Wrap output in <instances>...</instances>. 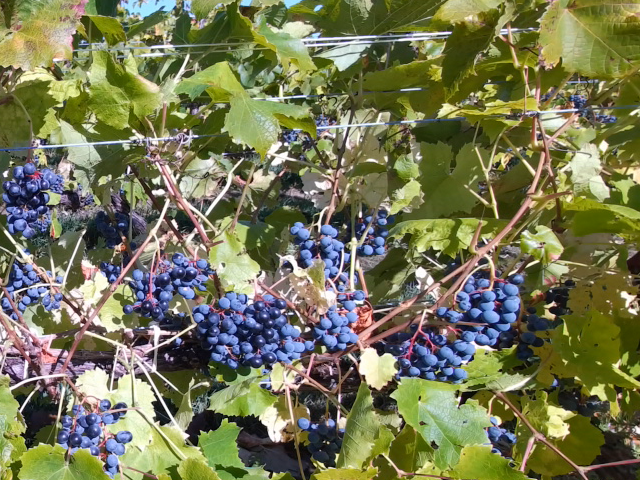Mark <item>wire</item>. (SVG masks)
<instances>
[{
	"instance_id": "obj_1",
	"label": "wire",
	"mask_w": 640,
	"mask_h": 480,
	"mask_svg": "<svg viewBox=\"0 0 640 480\" xmlns=\"http://www.w3.org/2000/svg\"><path fill=\"white\" fill-rule=\"evenodd\" d=\"M451 30L405 32V33H374L365 36H330V37H302V42H332L335 43H305V48H338L353 45H391L396 43H416L428 41H445L449 39Z\"/></svg>"
},
{
	"instance_id": "obj_2",
	"label": "wire",
	"mask_w": 640,
	"mask_h": 480,
	"mask_svg": "<svg viewBox=\"0 0 640 480\" xmlns=\"http://www.w3.org/2000/svg\"><path fill=\"white\" fill-rule=\"evenodd\" d=\"M257 41H227L226 43L218 42H201L187 44H165V45H128V46H108L107 50L111 52L130 51V50H167V49H189L216 47L208 49H196L186 52H165V53H136V58H167V57H188L198 54L222 53V52H273V47H235V46H257Z\"/></svg>"
},
{
	"instance_id": "obj_3",
	"label": "wire",
	"mask_w": 640,
	"mask_h": 480,
	"mask_svg": "<svg viewBox=\"0 0 640 480\" xmlns=\"http://www.w3.org/2000/svg\"><path fill=\"white\" fill-rule=\"evenodd\" d=\"M206 137L223 138L224 134L204 132L199 134H191V135H183L178 137H167V138H137V139L106 140V141L97 142V143L74 142V143H68V144H50V145H39V146L0 147V152L41 151V150H52V149H70V148H77V147L100 148V147L109 146V145H124V144H139V143H169V142H180L185 140L202 139Z\"/></svg>"
},
{
	"instance_id": "obj_4",
	"label": "wire",
	"mask_w": 640,
	"mask_h": 480,
	"mask_svg": "<svg viewBox=\"0 0 640 480\" xmlns=\"http://www.w3.org/2000/svg\"><path fill=\"white\" fill-rule=\"evenodd\" d=\"M466 116H461L458 118L451 117H440V118H427V119H417V120H378L369 123H357V124H340L335 126L330 125H316V130H327V131H337L342 129H359V128H371L380 125H419V124H429V123H461L466 121Z\"/></svg>"
},
{
	"instance_id": "obj_5",
	"label": "wire",
	"mask_w": 640,
	"mask_h": 480,
	"mask_svg": "<svg viewBox=\"0 0 640 480\" xmlns=\"http://www.w3.org/2000/svg\"><path fill=\"white\" fill-rule=\"evenodd\" d=\"M633 106H596V107H566L561 109L532 110L516 112V117H529L534 115L563 114L568 112H598V111H632Z\"/></svg>"
},
{
	"instance_id": "obj_6",
	"label": "wire",
	"mask_w": 640,
	"mask_h": 480,
	"mask_svg": "<svg viewBox=\"0 0 640 480\" xmlns=\"http://www.w3.org/2000/svg\"><path fill=\"white\" fill-rule=\"evenodd\" d=\"M500 32L503 36H507L509 34V32H524V33H539L540 29L537 27H532V28H526V27H509L508 29L506 28H501Z\"/></svg>"
}]
</instances>
